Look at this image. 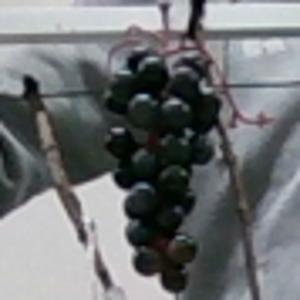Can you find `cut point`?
Segmentation results:
<instances>
[{
  "label": "cut point",
  "instance_id": "6a23745f",
  "mask_svg": "<svg viewBox=\"0 0 300 300\" xmlns=\"http://www.w3.org/2000/svg\"><path fill=\"white\" fill-rule=\"evenodd\" d=\"M174 0H158L157 1V9L160 12V17L162 20L163 26V46H162V53L163 58L167 57V47H168V36H169V29H170V13L173 8Z\"/></svg>",
  "mask_w": 300,
  "mask_h": 300
}]
</instances>
